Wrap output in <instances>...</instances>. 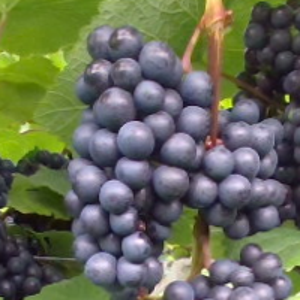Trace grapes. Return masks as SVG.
Segmentation results:
<instances>
[{
    "label": "grapes",
    "mask_w": 300,
    "mask_h": 300,
    "mask_svg": "<svg viewBox=\"0 0 300 300\" xmlns=\"http://www.w3.org/2000/svg\"><path fill=\"white\" fill-rule=\"evenodd\" d=\"M88 53L75 92L90 105L72 133L79 157L69 162L65 204L72 252L90 282L117 300L152 292L184 205L233 241L281 224L288 189L271 178L285 136L278 119L259 120L258 104L241 96L218 111L212 146L207 72L183 74L168 44H144L133 26L97 29Z\"/></svg>",
    "instance_id": "01657485"
},
{
    "label": "grapes",
    "mask_w": 300,
    "mask_h": 300,
    "mask_svg": "<svg viewBox=\"0 0 300 300\" xmlns=\"http://www.w3.org/2000/svg\"><path fill=\"white\" fill-rule=\"evenodd\" d=\"M241 260L214 261L209 276L196 275L189 283L173 281L164 289L165 300H285L293 290L283 273L282 258L263 252L256 244L241 249Z\"/></svg>",
    "instance_id": "b958b902"
}]
</instances>
